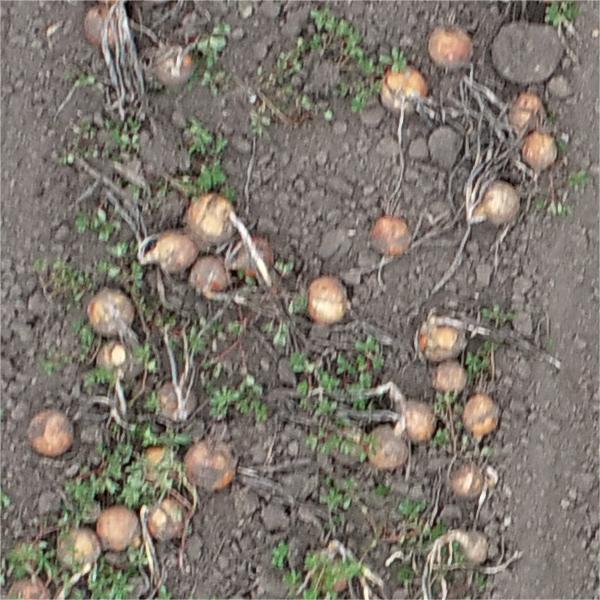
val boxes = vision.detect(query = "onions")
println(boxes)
[518,131,555,168]
[190,256,229,294]
[25,408,74,455]
[86,289,134,335]
[469,181,517,224]
[154,384,187,417]
[507,91,543,133]
[450,528,488,566]
[317,563,344,591]
[141,230,196,272]
[379,68,427,108]
[418,318,462,360]
[427,25,472,67]
[146,495,188,538]
[55,527,102,574]
[95,506,137,549]
[398,398,436,440]
[446,460,483,497]
[139,448,173,478]
[184,443,236,492]
[184,192,232,243]
[102,340,129,370]
[458,394,498,435]
[433,361,467,392]
[147,44,187,86]
[7,572,49,600]
[79,9,108,46]
[364,428,405,469]
[306,275,348,323]
[226,236,271,280]
[367,214,409,256]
